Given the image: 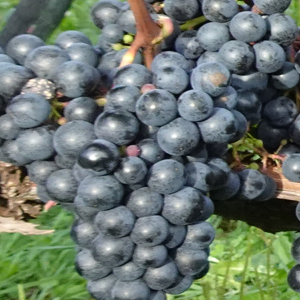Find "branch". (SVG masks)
Masks as SVG:
<instances>
[{"mask_svg": "<svg viewBox=\"0 0 300 300\" xmlns=\"http://www.w3.org/2000/svg\"><path fill=\"white\" fill-rule=\"evenodd\" d=\"M134 13V21L136 28V39L140 42V46L144 48V62L146 68L149 69L151 60H153V48L150 42L157 38L160 33V27L148 17L146 9L143 6V0H127Z\"/></svg>", "mask_w": 300, "mask_h": 300, "instance_id": "30e6481e", "label": "branch"}, {"mask_svg": "<svg viewBox=\"0 0 300 300\" xmlns=\"http://www.w3.org/2000/svg\"><path fill=\"white\" fill-rule=\"evenodd\" d=\"M278 183L276 195L271 199L300 202V182L289 180L282 172L281 168H274L271 165L260 170Z\"/></svg>", "mask_w": 300, "mask_h": 300, "instance_id": "325d2c04", "label": "branch"}]
</instances>
